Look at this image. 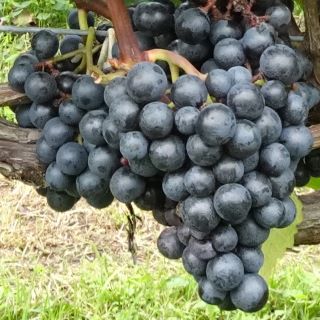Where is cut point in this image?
<instances>
[{
  "label": "cut point",
  "mask_w": 320,
  "mask_h": 320,
  "mask_svg": "<svg viewBox=\"0 0 320 320\" xmlns=\"http://www.w3.org/2000/svg\"><path fill=\"white\" fill-rule=\"evenodd\" d=\"M143 52L145 53L148 61L151 63H154L156 59H161L168 62L171 71L172 84H175L176 80L179 79V66L186 71L188 76H197L202 79L204 83L209 75L208 73L202 75V73L196 69L185 57L176 52L166 49H150Z\"/></svg>",
  "instance_id": "cut-point-1"
}]
</instances>
